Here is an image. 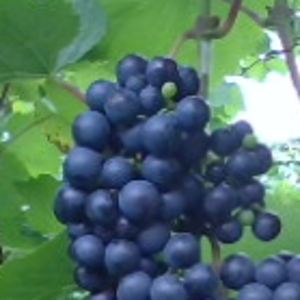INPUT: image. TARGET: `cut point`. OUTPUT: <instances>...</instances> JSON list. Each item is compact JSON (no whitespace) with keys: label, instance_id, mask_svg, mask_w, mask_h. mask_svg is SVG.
Wrapping results in <instances>:
<instances>
[{"label":"cut point","instance_id":"obj_1","mask_svg":"<svg viewBox=\"0 0 300 300\" xmlns=\"http://www.w3.org/2000/svg\"><path fill=\"white\" fill-rule=\"evenodd\" d=\"M196 33L197 29L195 27H189L186 31L181 35V37L174 43L171 48L170 55L174 58L177 57V53L180 51L181 47L186 42L196 41Z\"/></svg>","mask_w":300,"mask_h":300}]
</instances>
